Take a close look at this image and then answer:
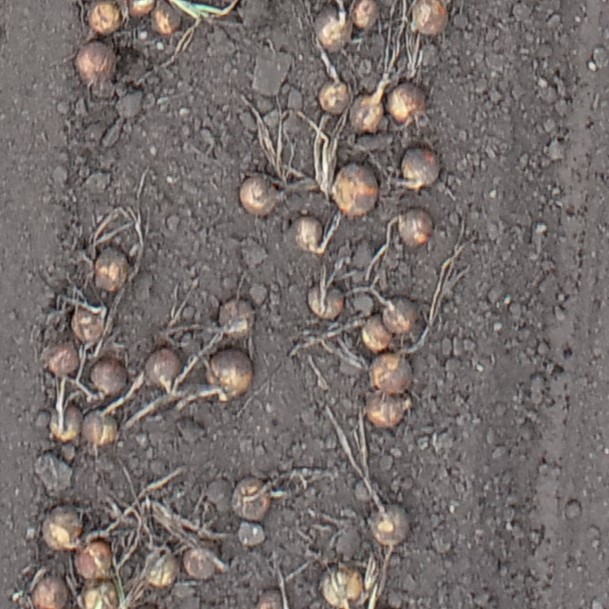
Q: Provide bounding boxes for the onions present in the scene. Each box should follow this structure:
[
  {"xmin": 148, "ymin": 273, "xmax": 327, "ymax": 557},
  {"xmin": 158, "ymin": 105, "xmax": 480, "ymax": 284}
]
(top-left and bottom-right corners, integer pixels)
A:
[
  {"xmin": 397, "ymin": 145, "xmax": 437, "ymax": 187},
  {"xmin": 73, "ymin": 42, "xmax": 116, "ymax": 84},
  {"xmin": 91, "ymin": 246, "xmax": 130, "ymax": 291},
  {"xmin": 310, "ymin": 596, "xmax": 342, "ymax": 609},
  {"xmin": 144, "ymin": 350, "xmax": 181, "ymax": 387},
  {"xmin": 364, "ymin": 391, "xmax": 405, "ymax": 427},
  {"xmin": 359, "ymin": 319, "xmax": 394, "ymax": 351},
  {"xmin": 328, "ymin": 166, "xmax": 380, "ymax": 215},
  {"xmin": 75, "ymin": 540, "xmax": 112, "ymax": 578},
  {"xmin": 128, "ymin": 0, "xmax": 153, "ymax": 18},
  {"xmin": 234, "ymin": 477, "xmax": 268, "ymax": 518},
  {"xmin": 290, "ymin": 218, "xmax": 325, "ymax": 254},
  {"xmin": 394, "ymin": 210, "xmax": 433, "ymax": 248},
  {"xmin": 46, "ymin": 409, "xmax": 81, "ymax": 443},
  {"xmin": 256, "ymin": 589, "xmax": 294, "ymax": 609},
  {"xmin": 151, "ymin": 6, "xmax": 179, "ymax": 35},
  {"xmin": 84, "ymin": 1, "xmax": 123, "ymax": 34},
  {"xmin": 180, "ymin": 547, "xmax": 216, "ymax": 579},
  {"xmin": 368, "ymin": 354, "xmax": 409, "ymax": 391},
  {"xmin": 206, "ymin": 350, "xmax": 251, "ymax": 398},
  {"xmin": 87, "ymin": 354, "xmax": 126, "ymax": 392},
  {"xmin": 381, "ymin": 297, "xmax": 417, "ymax": 337},
  {"xmin": 316, "ymin": 80, "xmax": 349, "ymax": 111},
  {"xmin": 350, "ymin": 93, "xmax": 384, "ymax": 131},
  {"xmin": 385, "ymin": 81, "xmax": 424, "ymax": 120},
  {"xmin": 41, "ymin": 507, "xmax": 81, "ymax": 548},
  {"xmin": 143, "ymin": 553, "xmax": 177, "ymax": 589},
  {"xmin": 314, "ymin": 11, "xmax": 349, "ymax": 47},
  {"xmin": 28, "ymin": 574, "xmax": 71, "ymax": 608},
  {"xmin": 369, "ymin": 507, "xmax": 409, "ymax": 546},
  {"xmin": 346, "ymin": 0, "xmax": 379, "ymax": 34},
  {"xmin": 215, "ymin": 299, "xmax": 250, "ymax": 337},
  {"xmin": 319, "ymin": 568, "xmax": 361, "ymax": 603},
  {"xmin": 80, "ymin": 580, "xmax": 119, "ymax": 608},
  {"xmin": 69, "ymin": 305, "xmax": 104, "ymax": 341},
  {"xmin": 306, "ymin": 284, "xmax": 341, "ymax": 318},
  {"xmin": 406, "ymin": 0, "xmax": 447, "ymax": 36},
  {"xmin": 82, "ymin": 413, "xmax": 118, "ymax": 447},
  {"xmin": 238, "ymin": 174, "xmax": 278, "ymax": 214},
  {"xmin": 42, "ymin": 343, "xmax": 78, "ymax": 377}
]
